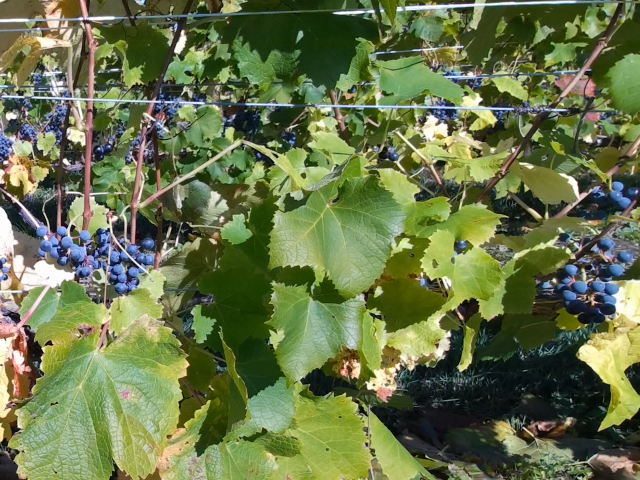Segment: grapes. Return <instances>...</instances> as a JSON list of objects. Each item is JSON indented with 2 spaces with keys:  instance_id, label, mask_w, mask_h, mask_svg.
<instances>
[{
  "instance_id": "obj_4",
  "label": "grapes",
  "mask_w": 640,
  "mask_h": 480,
  "mask_svg": "<svg viewBox=\"0 0 640 480\" xmlns=\"http://www.w3.org/2000/svg\"><path fill=\"white\" fill-rule=\"evenodd\" d=\"M126 251L131 257L136 258V262L141 264L143 269H146L147 265H153L155 263V257L152 255L142 254L139 246L136 244H129L126 247Z\"/></svg>"
},
{
  "instance_id": "obj_2",
  "label": "grapes",
  "mask_w": 640,
  "mask_h": 480,
  "mask_svg": "<svg viewBox=\"0 0 640 480\" xmlns=\"http://www.w3.org/2000/svg\"><path fill=\"white\" fill-rule=\"evenodd\" d=\"M617 259L622 264H629L633 260V255L630 251L621 250L617 254ZM622 264H610L609 270L602 269L600 273V280H593L591 282V289L593 291H602L597 296V301L602 303L600 305V312L596 308H587L585 303L579 300L578 295L587 293L589 285L587 282L575 281L571 284V289H568V284L571 283V279L565 277L560 280L561 284L556 286V292L566 301L565 308L568 314L578 315L577 320L584 324L601 323L604 321L603 315H612L615 312L617 298L615 297L619 293L620 285L612 282L614 277H620L624 273V267Z\"/></svg>"
},
{
  "instance_id": "obj_3",
  "label": "grapes",
  "mask_w": 640,
  "mask_h": 480,
  "mask_svg": "<svg viewBox=\"0 0 640 480\" xmlns=\"http://www.w3.org/2000/svg\"><path fill=\"white\" fill-rule=\"evenodd\" d=\"M612 189L608 193L601 186H596L591 191V200L598 207L616 205L619 210H626L632 205L634 197L640 195L639 187H627L621 180L612 182Z\"/></svg>"
},
{
  "instance_id": "obj_1",
  "label": "grapes",
  "mask_w": 640,
  "mask_h": 480,
  "mask_svg": "<svg viewBox=\"0 0 640 480\" xmlns=\"http://www.w3.org/2000/svg\"><path fill=\"white\" fill-rule=\"evenodd\" d=\"M56 234L61 238V246L59 240L55 237H51L49 241L41 240L40 246L37 248V256L45 257L46 253H49L50 259H56L57 264L60 266H67L69 264V257L63 255L64 249H70V257L74 266V275L78 278L88 277L91 274V268L95 270L102 269L106 273H110V283L114 285V292L117 295H124L126 292H132L137 289L138 274H142L143 270L136 266H130L127 269L128 277L133 278L130 282H127V275L123 273V267L119 264L121 260L125 263L129 262V257L122 251H110L109 267L106 262L100 263L97 259L101 255H108L110 249V232L106 229H99L97 240L99 247L93 251V254L87 256V263L91 266H83L81 263L85 261V250H90V244H85V249L82 246H78L77 243H73L71 236H65L67 234L66 226H59L56 229Z\"/></svg>"
}]
</instances>
